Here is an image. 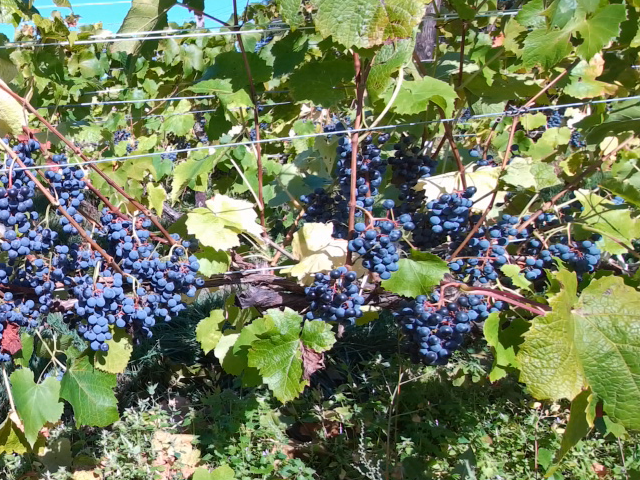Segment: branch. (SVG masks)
<instances>
[{"label": "branch", "mask_w": 640, "mask_h": 480, "mask_svg": "<svg viewBox=\"0 0 640 480\" xmlns=\"http://www.w3.org/2000/svg\"><path fill=\"white\" fill-rule=\"evenodd\" d=\"M25 174L36 184L41 193L54 205V207L72 224V226L78 230L85 238L86 242L95 249L103 258L111 264V266L121 275H125V271L116 263L114 257H110L98 244H96L85 229L79 225L74 218L69 215L65 209L58 203V201L45 189L42 183L35 177L31 171H26Z\"/></svg>", "instance_id": "branch-1"}, {"label": "branch", "mask_w": 640, "mask_h": 480, "mask_svg": "<svg viewBox=\"0 0 640 480\" xmlns=\"http://www.w3.org/2000/svg\"><path fill=\"white\" fill-rule=\"evenodd\" d=\"M91 167L97 172L99 173L117 192H119V194L122 196L123 199H125L127 202L131 203L132 205L138 207L139 209L143 210L145 215L151 219L153 221V223L155 224V226L161 230L162 233H164L167 236L168 240L162 239L157 237L154 234L150 235V238L157 242L160 243L162 245H166L169 246L170 243L173 244L174 246H178L179 242L175 241L174 239L171 238V232L169 230H167L160 222L159 220L150 212V210L142 203L138 202L137 200L133 199L132 197L128 196L125 191L109 176L107 175V173L101 169L99 166H97L96 164H91Z\"/></svg>", "instance_id": "branch-2"}, {"label": "branch", "mask_w": 640, "mask_h": 480, "mask_svg": "<svg viewBox=\"0 0 640 480\" xmlns=\"http://www.w3.org/2000/svg\"><path fill=\"white\" fill-rule=\"evenodd\" d=\"M0 88H2L5 92H7L8 94H10L12 97H14L15 99H17L19 102H21L24 106H26L34 115V117L43 124V126L53 135H55L56 137H58L60 140H62L64 143H66L68 145V147L77 155H79V157L82 160L88 159V157L83 153L82 150L78 149L75 147V145L73 144V142L68 139L67 137H65L64 135H62L60 132H58L56 129H54L53 127H51V125L42 117L40 116V114L38 113V110L29 102L27 101L25 98H23L22 96H20L17 92L13 91L11 88H9L5 83H0Z\"/></svg>", "instance_id": "branch-3"}, {"label": "branch", "mask_w": 640, "mask_h": 480, "mask_svg": "<svg viewBox=\"0 0 640 480\" xmlns=\"http://www.w3.org/2000/svg\"><path fill=\"white\" fill-rule=\"evenodd\" d=\"M440 284L441 285H453L455 288H458V289H461V290H464V291H475V290H478V291H482V292H486V293H494V294L499 295V296L513 298L516 301H519V302L524 303V304L538 305V306H541L542 308H544L546 310H550L551 309V306L546 304V303H544L543 301L526 299V298H523V297L517 295L516 293H510V292L498 290L496 288H488V287L480 286V285L468 286L467 284L458 283L455 280H441Z\"/></svg>", "instance_id": "branch-4"}, {"label": "branch", "mask_w": 640, "mask_h": 480, "mask_svg": "<svg viewBox=\"0 0 640 480\" xmlns=\"http://www.w3.org/2000/svg\"><path fill=\"white\" fill-rule=\"evenodd\" d=\"M357 141H358V134L354 133L353 134V139H352V155H351V158H350L351 175L349 176V186H350V189H351V200L349 201V206H350L349 223H350V227H349L348 233H347V239L348 240L352 239L353 231L355 230L354 213H355V209H356V189H357V175H356V168H355V160H356V157H357Z\"/></svg>", "instance_id": "branch-5"}, {"label": "branch", "mask_w": 640, "mask_h": 480, "mask_svg": "<svg viewBox=\"0 0 640 480\" xmlns=\"http://www.w3.org/2000/svg\"><path fill=\"white\" fill-rule=\"evenodd\" d=\"M603 164L602 160H598L597 162H594L592 166H590L589 168L585 169L584 172L579 176V178L572 184H570L569 186L565 187L564 189H562L558 194H556L555 196H553L550 201L548 203L545 204V206L536 214H534L529 220H526L524 223H522L519 226L520 230H524L527 226L531 225L532 223H534L539 217H541L551 206H554L558 203V200L567 192L573 190L574 188H576L577 186L580 185V183L585 179V177L591 173L592 171H595L597 169V167H599L600 165Z\"/></svg>", "instance_id": "branch-6"}, {"label": "branch", "mask_w": 640, "mask_h": 480, "mask_svg": "<svg viewBox=\"0 0 640 480\" xmlns=\"http://www.w3.org/2000/svg\"><path fill=\"white\" fill-rule=\"evenodd\" d=\"M237 42L241 49V53L244 59V71L248 76L249 83H250V92H251L252 101H253V124L256 132V140H258V139H261V129L258 122V98L255 90V81H254L253 73L249 68V57L246 51L245 44L242 39V35H237Z\"/></svg>", "instance_id": "branch-7"}, {"label": "branch", "mask_w": 640, "mask_h": 480, "mask_svg": "<svg viewBox=\"0 0 640 480\" xmlns=\"http://www.w3.org/2000/svg\"><path fill=\"white\" fill-rule=\"evenodd\" d=\"M497 195H498V192L494 191L490 202L482 210V212L480 214V218L477 220V222L474 225L473 229L471 231H469L458 242L457 248L448 256V258H447V262L448 263L452 262L453 258H455L461 252L463 245L478 231V229L481 226L482 222L485 220V216H486L487 212L494 206V204H495V202L497 200Z\"/></svg>", "instance_id": "branch-8"}, {"label": "branch", "mask_w": 640, "mask_h": 480, "mask_svg": "<svg viewBox=\"0 0 640 480\" xmlns=\"http://www.w3.org/2000/svg\"><path fill=\"white\" fill-rule=\"evenodd\" d=\"M256 158H257V173H258V181H259V197H258V210L261 216V224H266V214L263 208V199H264V179H263V171H262V156H261V144L256 145Z\"/></svg>", "instance_id": "branch-9"}, {"label": "branch", "mask_w": 640, "mask_h": 480, "mask_svg": "<svg viewBox=\"0 0 640 480\" xmlns=\"http://www.w3.org/2000/svg\"><path fill=\"white\" fill-rule=\"evenodd\" d=\"M354 60H355V70H356V85L359 92V98H358L356 118H355L353 128H359L360 120H361V111H362V106L364 101V90L361 83V68H360V58H359L358 52L354 53Z\"/></svg>", "instance_id": "branch-10"}, {"label": "branch", "mask_w": 640, "mask_h": 480, "mask_svg": "<svg viewBox=\"0 0 640 480\" xmlns=\"http://www.w3.org/2000/svg\"><path fill=\"white\" fill-rule=\"evenodd\" d=\"M442 125L445 128L447 140L449 142L452 154H453V156L455 157V159L457 161L458 169H459L460 174H461L462 186L466 187L467 186L466 171L464 169L460 154L458 153V151L456 149V145L454 143V140H453V137H452V134H451L450 125L449 124H442Z\"/></svg>", "instance_id": "branch-11"}, {"label": "branch", "mask_w": 640, "mask_h": 480, "mask_svg": "<svg viewBox=\"0 0 640 480\" xmlns=\"http://www.w3.org/2000/svg\"><path fill=\"white\" fill-rule=\"evenodd\" d=\"M518 122H519V117L518 116H514L511 119L510 126L508 128L506 152H505L504 158L502 160V167L503 168L507 167V162L509 161V157H510V154H511V148H512L513 131L517 130Z\"/></svg>", "instance_id": "branch-12"}, {"label": "branch", "mask_w": 640, "mask_h": 480, "mask_svg": "<svg viewBox=\"0 0 640 480\" xmlns=\"http://www.w3.org/2000/svg\"><path fill=\"white\" fill-rule=\"evenodd\" d=\"M86 186L96 195H98V197L105 203V205L108 207V209L117 217H119L122 220L128 221L129 220V216L125 215L123 213H121L120 211H118L109 201V199L96 187H94L92 185L91 182H87Z\"/></svg>", "instance_id": "branch-13"}, {"label": "branch", "mask_w": 640, "mask_h": 480, "mask_svg": "<svg viewBox=\"0 0 640 480\" xmlns=\"http://www.w3.org/2000/svg\"><path fill=\"white\" fill-rule=\"evenodd\" d=\"M578 62H579V59L577 58V59H576V61H575L572 65H570L568 69H566V70H565V71H563L562 73H559V74H558V76H557L556 78H553V80H552V81H550L547 85H545V86H544V87H543L539 92H537V93H536V94H535V95H534L530 100H528L527 102H525V103H524V107H525V108H528V107H529V105H530L532 102L536 101V100L538 99V97H539L543 92H545L548 88H550V87H551V85H553V84H554V82H555L556 80H558L560 77H562V76L564 75V73H567V72H568V71H569V70H570V69H571V68H572L576 63H578Z\"/></svg>", "instance_id": "branch-14"}, {"label": "branch", "mask_w": 640, "mask_h": 480, "mask_svg": "<svg viewBox=\"0 0 640 480\" xmlns=\"http://www.w3.org/2000/svg\"><path fill=\"white\" fill-rule=\"evenodd\" d=\"M0 144L5 148V150L12 156L14 161L20 166L24 167L25 163L19 158V156L15 153V151L7 144V142L0 138Z\"/></svg>", "instance_id": "branch-15"}, {"label": "branch", "mask_w": 640, "mask_h": 480, "mask_svg": "<svg viewBox=\"0 0 640 480\" xmlns=\"http://www.w3.org/2000/svg\"><path fill=\"white\" fill-rule=\"evenodd\" d=\"M78 212L84 216L85 219H87V221L98 231H102L103 227L101 225H99L97 222H95V220L91 217L90 214H88L85 210H83L82 208L78 209Z\"/></svg>", "instance_id": "branch-16"}, {"label": "branch", "mask_w": 640, "mask_h": 480, "mask_svg": "<svg viewBox=\"0 0 640 480\" xmlns=\"http://www.w3.org/2000/svg\"><path fill=\"white\" fill-rule=\"evenodd\" d=\"M412 56H413V59H414V61H415L416 65L419 67V70H420L424 75H427V74H428V71L424 68L423 63L420 61V59H419V57H418V53H417L416 51H413V52H412Z\"/></svg>", "instance_id": "branch-17"}, {"label": "branch", "mask_w": 640, "mask_h": 480, "mask_svg": "<svg viewBox=\"0 0 640 480\" xmlns=\"http://www.w3.org/2000/svg\"><path fill=\"white\" fill-rule=\"evenodd\" d=\"M36 172H37V173H39V175H41V176L44 178V180L47 182V184H48V185H50V184H51V181H49V180L46 178L45 174H44L41 170H36Z\"/></svg>", "instance_id": "branch-18"}]
</instances>
